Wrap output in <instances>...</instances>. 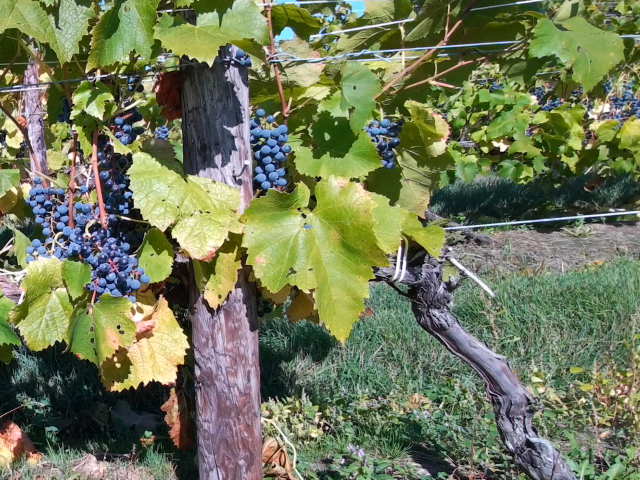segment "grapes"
Here are the masks:
<instances>
[{
	"instance_id": "obj_1",
	"label": "grapes",
	"mask_w": 640,
	"mask_h": 480,
	"mask_svg": "<svg viewBox=\"0 0 640 480\" xmlns=\"http://www.w3.org/2000/svg\"><path fill=\"white\" fill-rule=\"evenodd\" d=\"M110 145L111 142L108 135L100 134L98 136L99 150L97 160L99 161V167L101 169L113 168L111 179L108 171L99 173V179L104 183V188L109 190V193L103 194L104 209L108 213L106 216L107 229L102 228L100 224H96L89 229V234L92 235L91 239L87 240L82 236L86 221L93 220L94 214H100L98 203L94 204L93 213L89 203L76 202L74 204V208L77 211H82L74 213V221L76 222L74 229L66 225L69 219L67 214L68 204H58L54 212V218L59 220L56 223V230L61 232L63 237H69L70 240L64 244L65 239L60 238L58 243L53 245V255L60 262H64L68 257L79 255L84 257L86 262L91 265V278L96 280L99 276L97 284L91 281L86 286L88 292H93L96 286V291L99 294L110 293L113 297L122 296L135 303L137 298L132 294L133 290H139L142 283L148 284L150 277L144 274L145 270L138 265L136 257L128 256L126 252L131 249V245L128 243L127 235L123 231L116 229L119 224L117 215H128L130 203L124 201L123 204L117 205V200L114 197V194L121 189L125 200L133 198V192L127 190L130 176L122 173L126 166H130L133 163V156L131 154L123 156L120 153H115L110 158L108 153L104 151V148ZM109 260L114 262L119 273L111 271Z\"/></svg>"
},
{
	"instance_id": "obj_2",
	"label": "grapes",
	"mask_w": 640,
	"mask_h": 480,
	"mask_svg": "<svg viewBox=\"0 0 640 480\" xmlns=\"http://www.w3.org/2000/svg\"><path fill=\"white\" fill-rule=\"evenodd\" d=\"M267 114L265 109H257L255 116L264 117ZM257 118L250 119V143L256 144L260 138L266 140V145L257 144L252 148L253 159L257 162L254 169V181L261 185L263 190L271 189L273 186L285 187L287 180L284 177L286 170L279 168V163L275 160L285 162L292 147L285 144L289 140V127L280 124L276 129H264Z\"/></svg>"
},
{
	"instance_id": "obj_3",
	"label": "grapes",
	"mask_w": 640,
	"mask_h": 480,
	"mask_svg": "<svg viewBox=\"0 0 640 480\" xmlns=\"http://www.w3.org/2000/svg\"><path fill=\"white\" fill-rule=\"evenodd\" d=\"M65 194V190L62 188L55 189L53 187H48L44 189L41 186H36L34 189L28 190V196L24 197V203L26 206L32 207V214L35 217V223L40 225L43 229L41 230V236L46 237L43 241L37 238H34L31 241V246L26 248V256L25 263L29 264L30 262H35L36 258L34 256L37 253L38 256L44 259H50L51 255L47 254V248L43 247L44 244L53 241L51 237V221L47 220L49 217V212L52 211L53 207V199L48 198L49 196H63Z\"/></svg>"
},
{
	"instance_id": "obj_4",
	"label": "grapes",
	"mask_w": 640,
	"mask_h": 480,
	"mask_svg": "<svg viewBox=\"0 0 640 480\" xmlns=\"http://www.w3.org/2000/svg\"><path fill=\"white\" fill-rule=\"evenodd\" d=\"M405 123L406 120L404 118L398 119L394 123H391L389 118H382L380 121L372 120L368 126L364 128L370 140L374 144H377V149L383 151L385 158L381 160V163L387 169H393L395 167L394 148L401 143L398 133L403 131V125Z\"/></svg>"
},
{
	"instance_id": "obj_5",
	"label": "grapes",
	"mask_w": 640,
	"mask_h": 480,
	"mask_svg": "<svg viewBox=\"0 0 640 480\" xmlns=\"http://www.w3.org/2000/svg\"><path fill=\"white\" fill-rule=\"evenodd\" d=\"M144 119V115L138 113L135 108L125 109L120 113V117H115L113 123L116 125V131L114 137L119 139V143L122 146L132 144L137 140V136H141L145 133L144 127H135V123Z\"/></svg>"
},
{
	"instance_id": "obj_6",
	"label": "grapes",
	"mask_w": 640,
	"mask_h": 480,
	"mask_svg": "<svg viewBox=\"0 0 640 480\" xmlns=\"http://www.w3.org/2000/svg\"><path fill=\"white\" fill-rule=\"evenodd\" d=\"M63 106L61 107V114L58 115V122L64 123L66 122L68 125H72L73 121L70 119L71 110L68 107V100L66 98L62 99Z\"/></svg>"
}]
</instances>
